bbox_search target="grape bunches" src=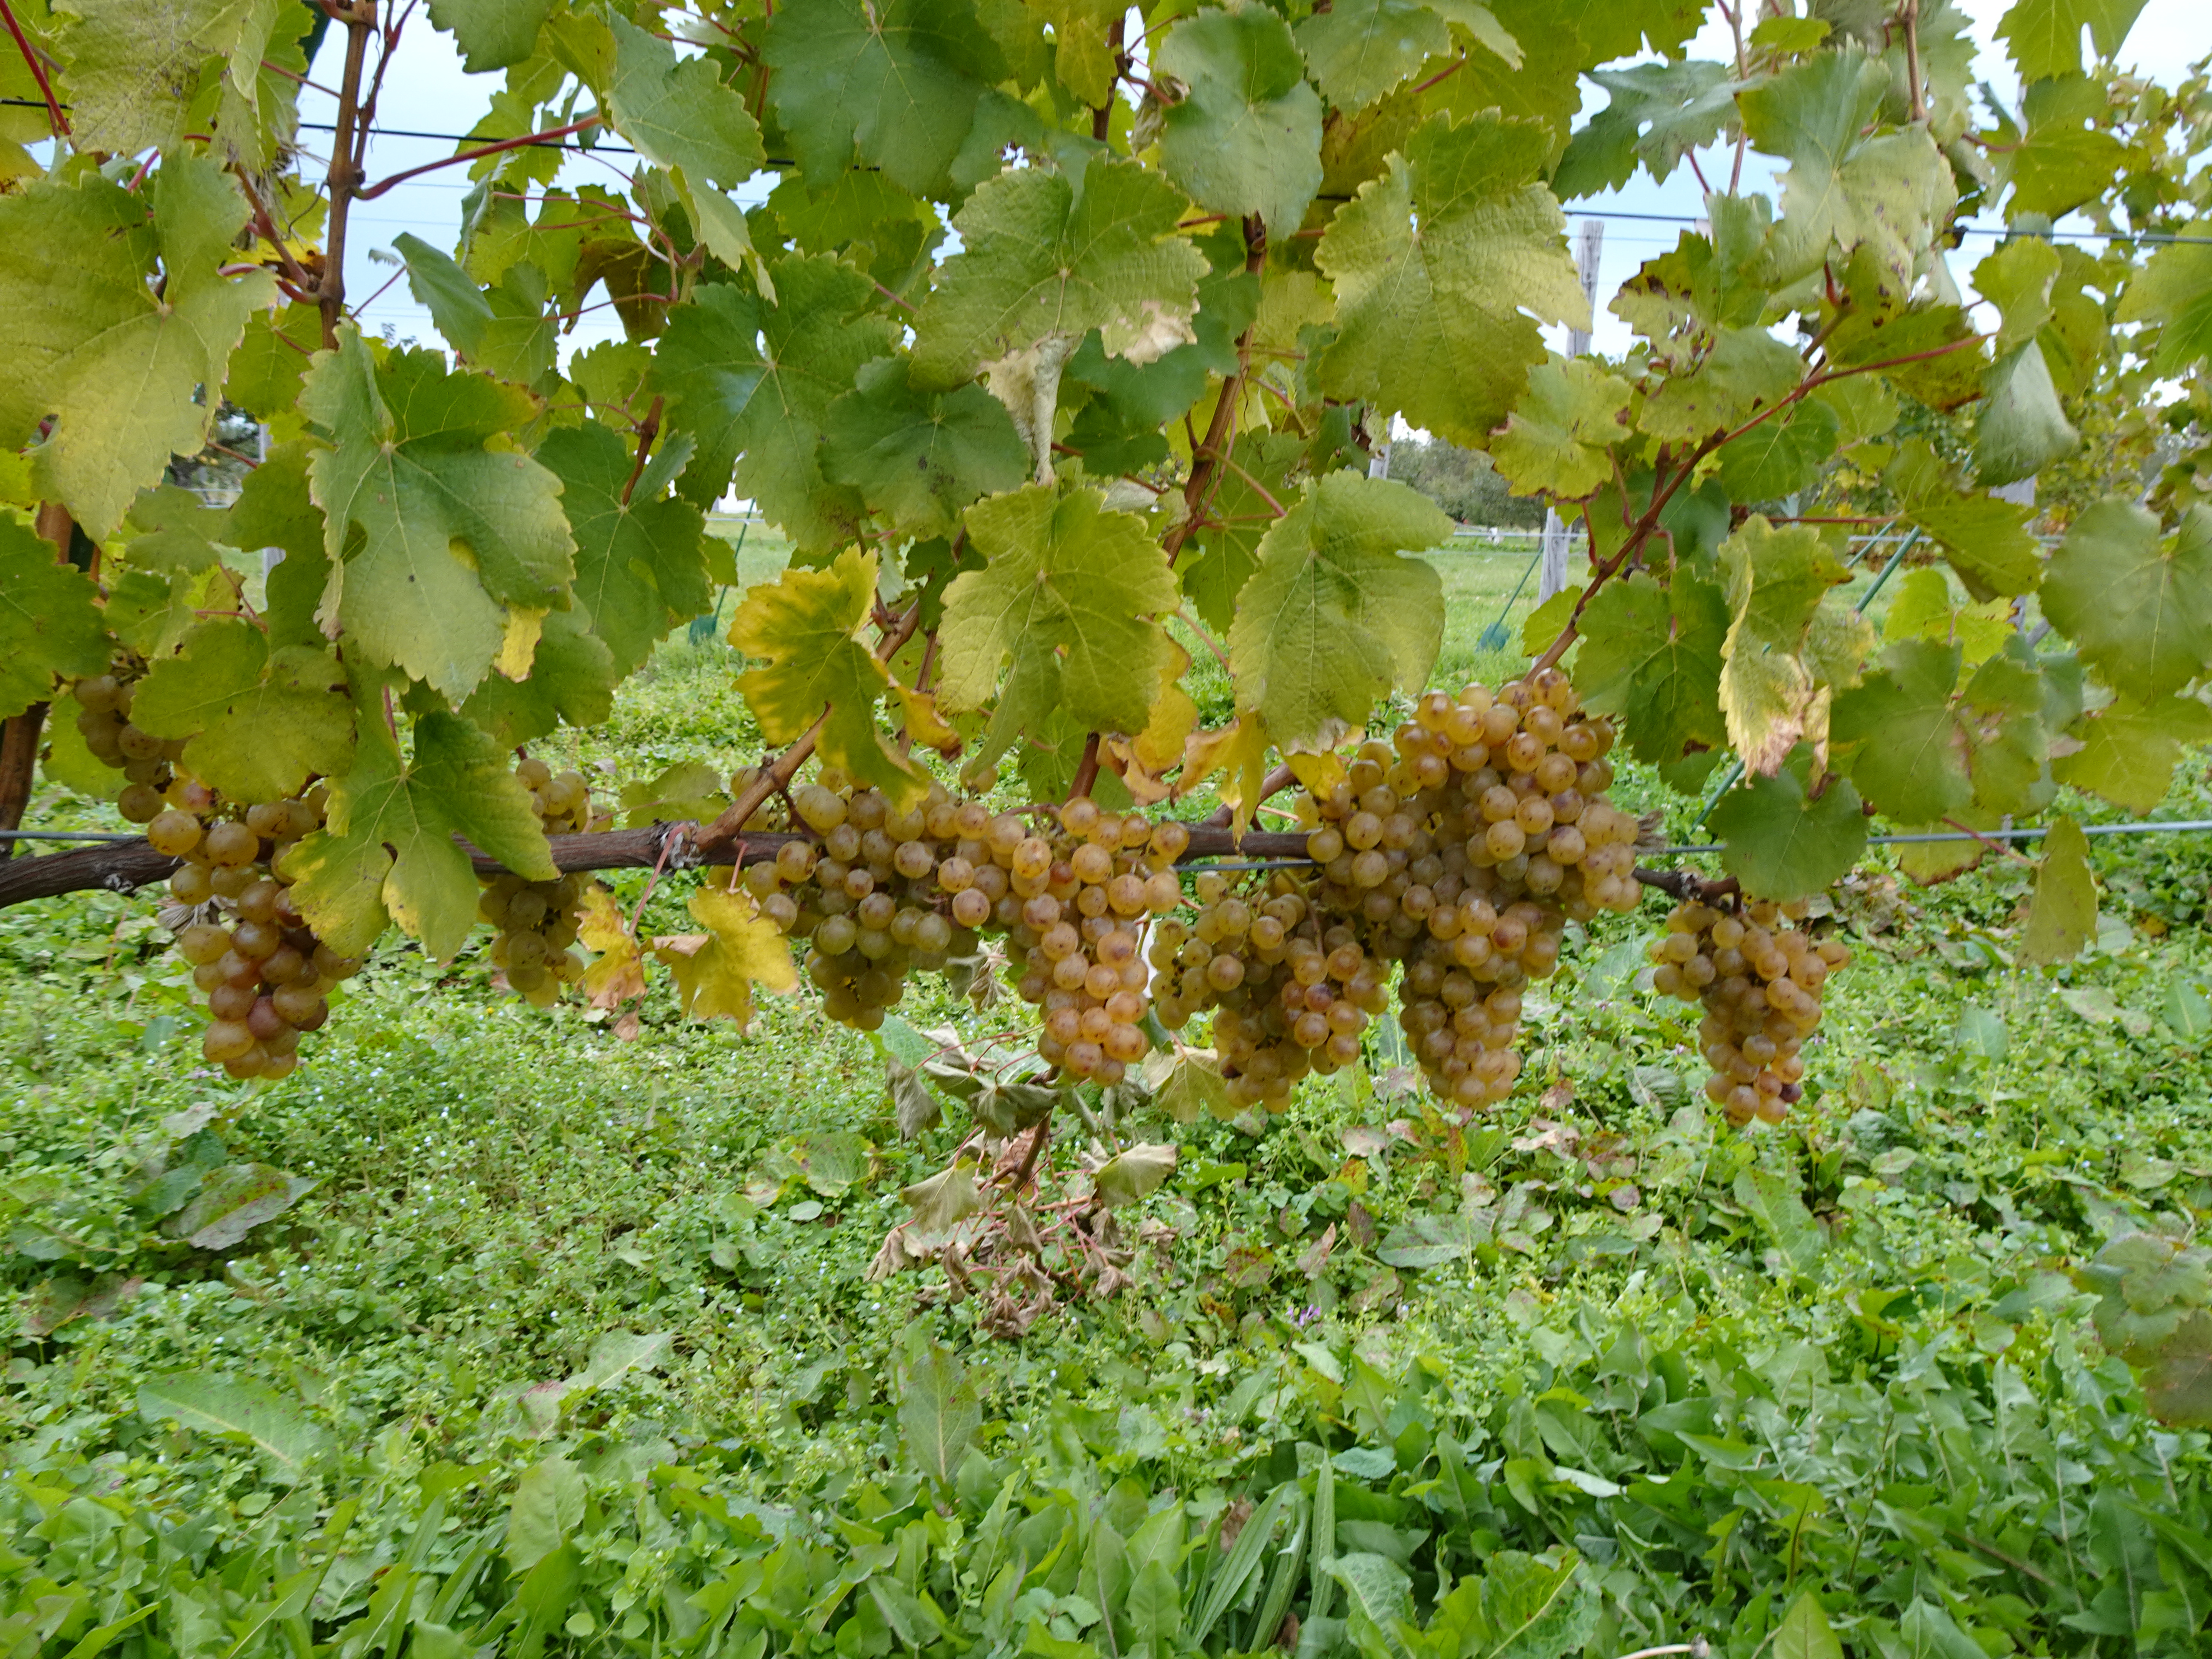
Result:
[939,752,1150,1092]
[885,758,1196,932]
[73,651,215,825]
[1290,682,1647,1106]
[1649,891,1856,1133]
[142,779,373,1084]
[1147,853,1305,1032]
[725,760,948,1035]
[1277,917,1398,1079]
[1209,992,1316,1115]
[468,754,615,1012]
